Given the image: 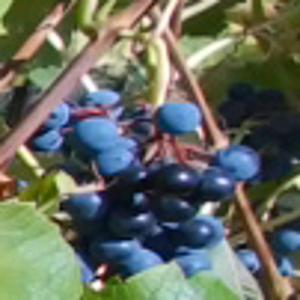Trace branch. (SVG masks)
I'll use <instances>...</instances> for the list:
<instances>
[{"label": "branch", "instance_id": "30e6481e", "mask_svg": "<svg viewBox=\"0 0 300 300\" xmlns=\"http://www.w3.org/2000/svg\"><path fill=\"white\" fill-rule=\"evenodd\" d=\"M157 0H139L129 9L109 19L71 60V63L63 70L54 81L51 88L28 109L19 122L5 136L0 137V169L10 167L17 147L27 144L38 127L46 120L49 113L55 108L67 90L76 79L86 71L96 60L104 55L109 45L120 38L122 30H129L136 26L137 21L147 15L148 19L155 23L156 29L163 34L169 56L174 63L180 78L188 90L192 100L198 106L202 121L208 133L210 148L218 150L228 144L225 131L215 125L207 104L200 94L188 68L186 67L175 42L171 28L155 6Z\"/></svg>", "mask_w": 300, "mask_h": 300}, {"label": "branch", "instance_id": "170604dd", "mask_svg": "<svg viewBox=\"0 0 300 300\" xmlns=\"http://www.w3.org/2000/svg\"><path fill=\"white\" fill-rule=\"evenodd\" d=\"M235 196L240 204L244 222L247 225L252 240L260 253L263 268L272 285L274 296L277 300H300V295L294 291L289 281L279 274L276 267L275 257L270 245L267 243L264 235L263 226L257 223L253 217L252 209L247 198V191L243 182L234 184Z\"/></svg>", "mask_w": 300, "mask_h": 300}, {"label": "branch", "instance_id": "325d2c04", "mask_svg": "<svg viewBox=\"0 0 300 300\" xmlns=\"http://www.w3.org/2000/svg\"><path fill=\"white\" fill-rule=\"evenodd\" d=\"M76 0H59L25 39L0 73V92L6 91L30 57L48 39L63 17L75 6Z\"/></svg>", "mask_w": 300, "mask_h": 300}]
</instances>
